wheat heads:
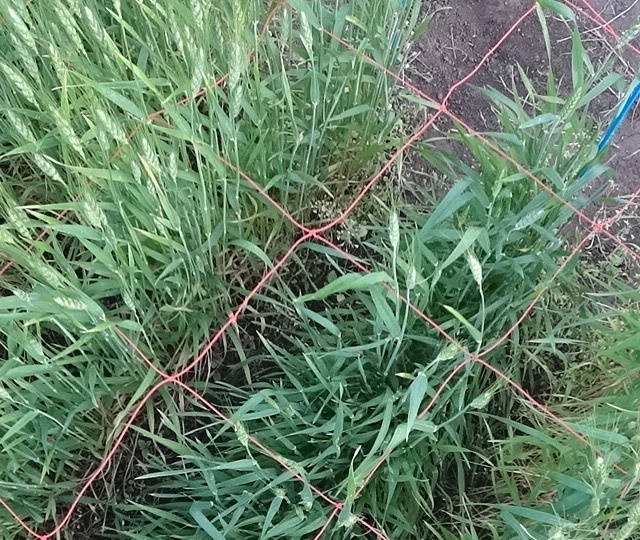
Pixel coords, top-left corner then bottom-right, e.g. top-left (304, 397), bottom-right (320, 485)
top-left (591, 497), bottom-right (603, 516)
top-left (230, 0), bottom-right (244, 26)
top-left (8, 211), bottom-right (30, 243)
top-left (559, 87), bottom-right (584, 123)
top-left (299, 11), bottom-right (310, 49)
top-left (147, 32), bottom-right (160, 68)
top-left (2, 64), bottom-right (34, 105)
top-left (281, 9), bottom-right (288, 49)
top-left (55, 4), bottom-right (84, 48)
top-left (6, 109), bottom-right (37, 140)
top-left (470, 393), bottom-right (491, 407)
top-left (230, 86), bottom-right (243, 117)
top-left (15, 288), bottom-right (29, 303)
top-left (616, 521), bottom-right (635, 538)
top-left (151, 216), bottom-right (167, 237)
top-left (166, 4), bottom-right (183, 50)
top-left (11, 34), bottom-right (43, 79)
top-left (404, 264), bottom-right (419, 292)
top-left (38, 264), bottom-right (57, 287)
top-left (54, 297), bottom-right (85, 313)
top-left (30, 336), bottom-right (45, 359)
top-left (187, 0), bottom-right (208, 29)
top-left (87, 6), bottom-right (115, 49)
top-left (439, 346), bottom-right (464, 361)
top-left (8, 7), bottom-right (38, 52)
top-left (94, 105), bottom-right (130, 143)
top-left (230, 421), bottom-right (248, 447)
top-left (144, 181), bottom-right (156, 196)
top-left (492, 177), bottom-right (504, 195)
top-left (227, 42), bottom-right (241, 87)
top-left (7, 196), bottom-right (30, 226)
top-left (50, 106), bottom-right (82, 154)
top-left (79, 192), bottom-right (109, 229)
top-left (168, 152), bottom-right (178, 179)
top-left (143, 142), bottom-right (160, 169)
top-left (121, 291), bottom-right (138, 310)
top-left (466, 255), bottom-right (486, 286)
top-left (191, 49), bottom-right (204, 94)
top-left (591, 455), bottom-right (608, 489)
top-left (50, 41), bottom-right (71, 81)
top-left (129, 161), bottom-right (141, 182)
top-left (388, 209), bottom-right (403, 247)
top-left (516, 212), bottom-right (543, 230)
top-left (33, 151), bottom-right (56, 181)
